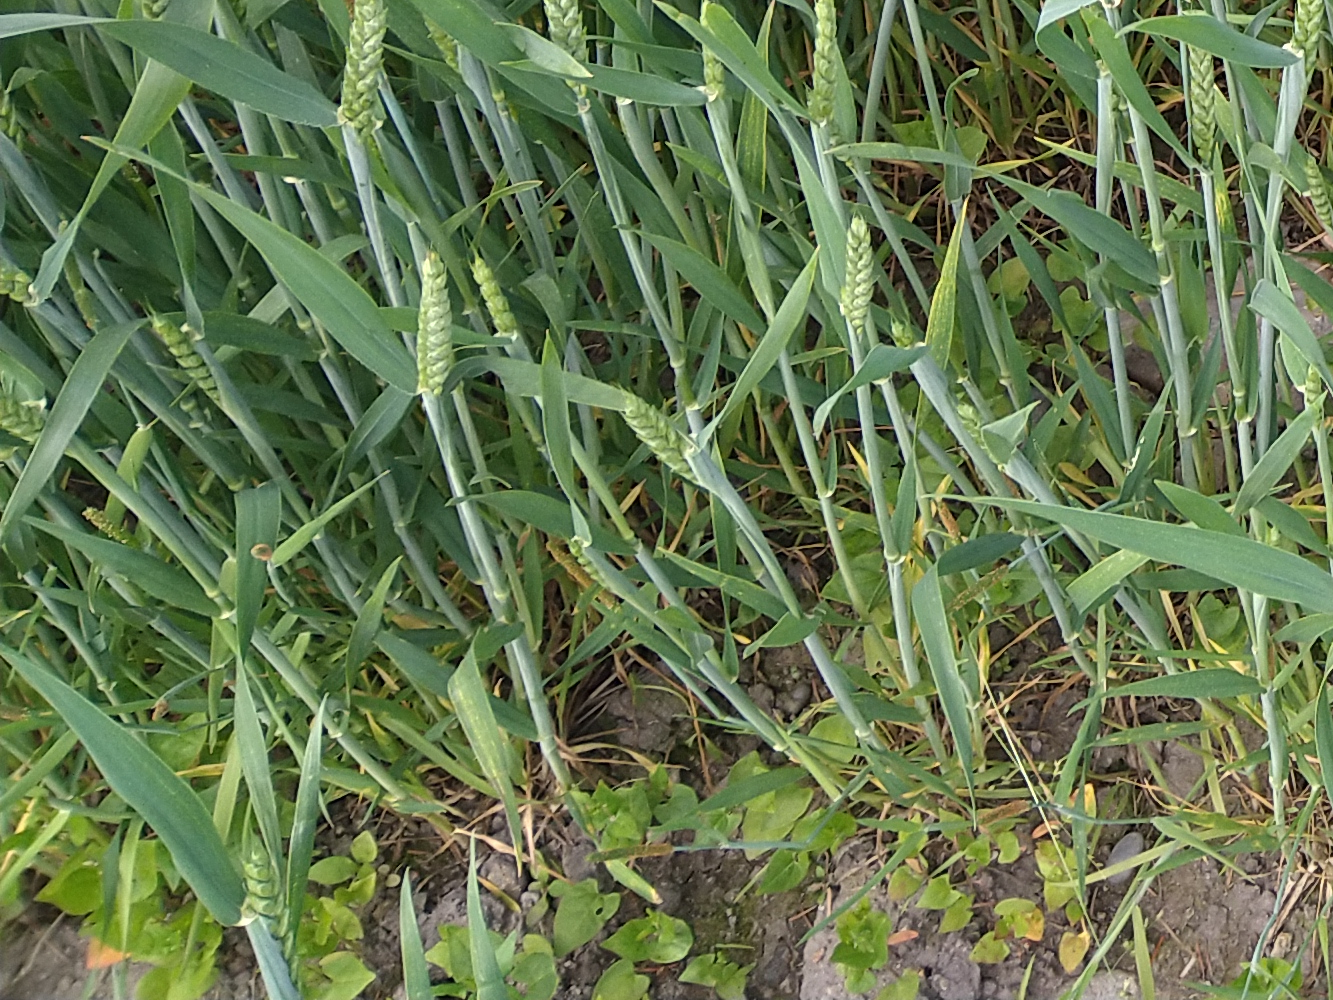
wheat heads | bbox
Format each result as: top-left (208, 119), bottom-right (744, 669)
top-left (242, 826), bottom-right (292, 962)
top-left (0, 377), bottom-right (49, 443)
top-left (1179, 38), bottom-right (1216, 163)
top-left (110, 0), bottom-right (169, 21)
top-left (836, 214), bottom-right (870, 339)
top-left (567, 542), bottom-right (611, 589)
top-left (0, 263), bottom-right (35, 300)
top-left (84, 505), bottom-right (130, 542)
top-left (804, 95), bottom-right (853, 166)
top-left (417, 256), bottom-right (450, 395)
top-left (0, 101), bottom-right (22, 146)
top-left (150, 318), bottom-right (219, 406)
top-left (1291, 0), bottom-right (1328, 56)
top-left (339, 0), bottom-right (384, 127)
top-left (526, 0), bottom-right (592, 90)
top-left (623, 396), bottom-right (698, 480)
top-left (1306, 149), bottom-right (1333, 230)
top-left (703, 1), bottom-right (717, 80)
top-left (398, 0), bottom-right (460, 65)
top-left (809, 0), bottom-right (835, 137)
top-left (221, 0), bottom-right (243, 21)
top-left (470, 258), bottom-right (535, 361)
